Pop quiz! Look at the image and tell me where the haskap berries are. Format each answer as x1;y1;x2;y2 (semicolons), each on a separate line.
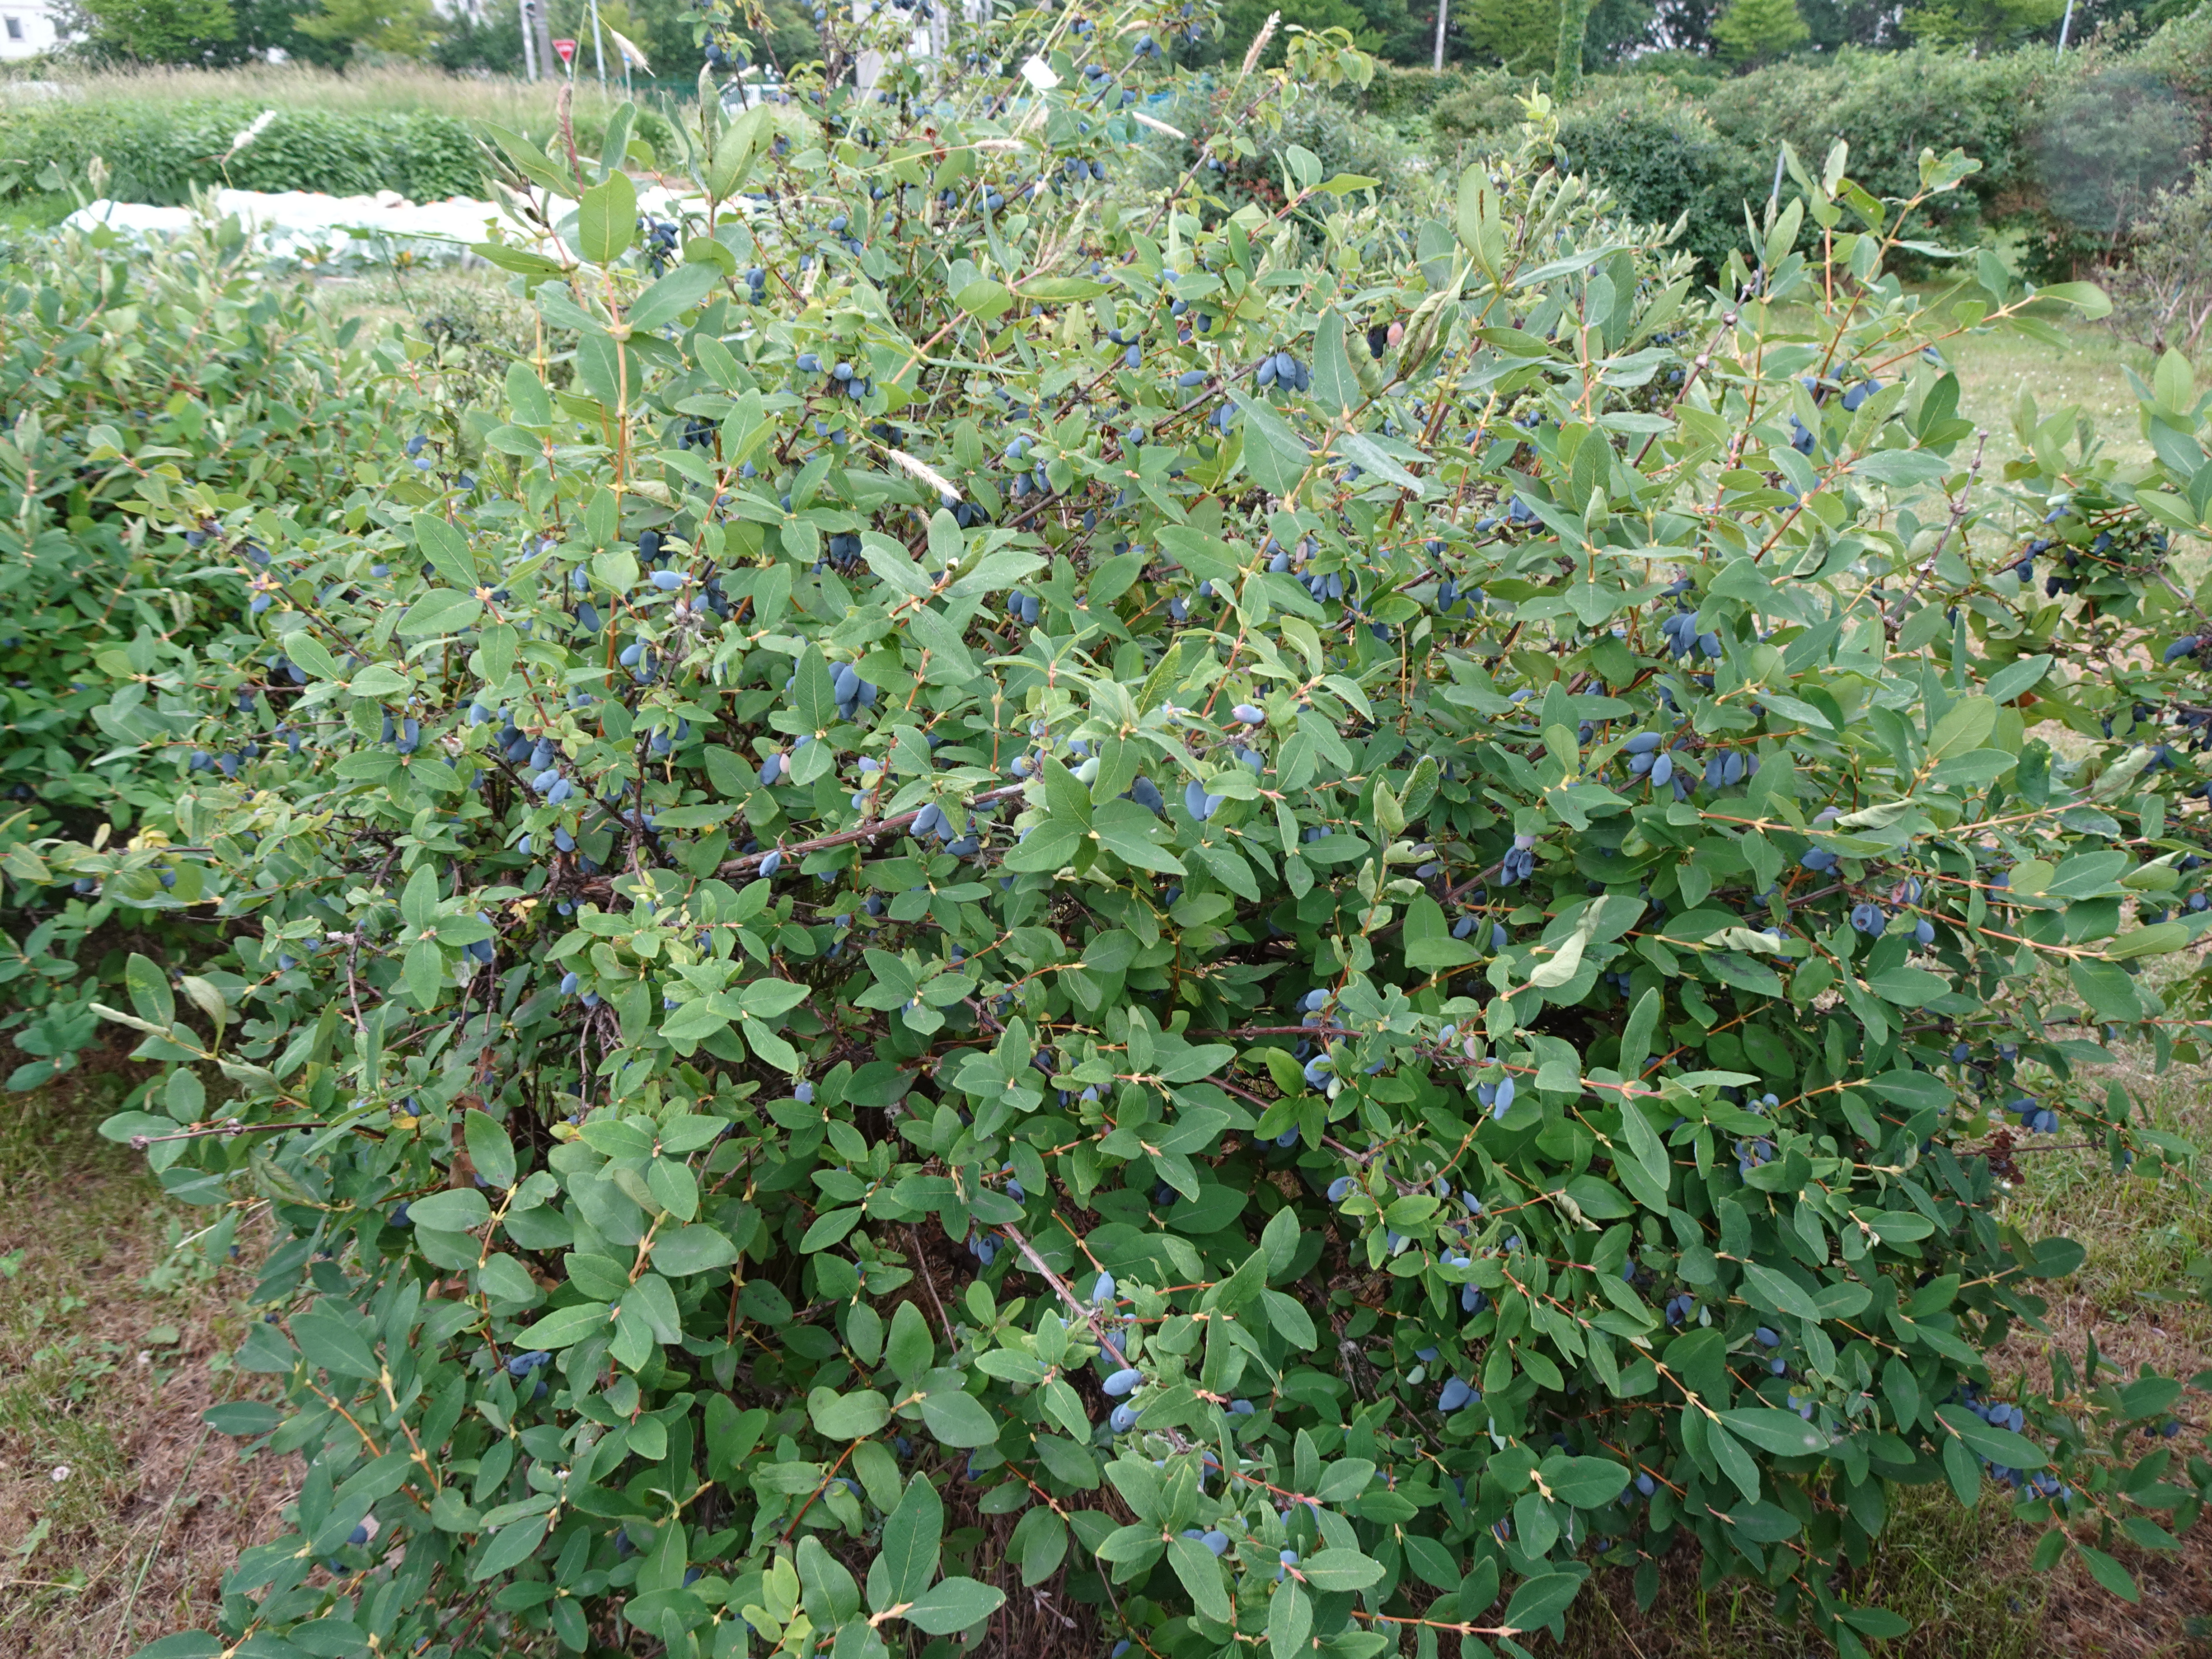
861;675;877;707
979;185;996;196
1670;633;1685;659
1039;40;1049;53
477;912;489;923
1556;233;1561;240
2132;706;2147;721
1507;493;1532;521
421;563;435;573
1657;335;1663;341
706;588;719;610
1078;23;1090;41
871;1;881;10
470;768;485;790
1724;751;1742;785
1673;775;1685;800
1999;1047;2016;1060
1007;175;1020;183
1653;898;1664;911
1347;571;1357;594
1233;667;1251;680
1268;922;1286;938
1437;1178;1451;1196
2112;705;2133;740
1468;587;1484;602
1114;100;1123;114
523;547;544;563
1422;415;1430;422
1070;1056;1080;1070
945;833;983;855
779;93;789;104
1152;1460;1162;1467
1102;1369;1145;1396
1786;908;1794;923
1116;433;1125;442
1385;419;1394;427
318;584;334;603
74;878;98;892
999;875;1013;890
2019;532;2035;542
1989;1399;2016;1420
1276;1549;1299;1579
1295;360;1309;392
414;458;431;468
1752;1141;1775;1161
865;1182;877;1189
1071;22;1080;33
1110;1406;1131;1432
579;601;598;632
532;1381;548;1397
991;1233;1004;1249
1050;177;1063;195
1077;596;1087;605
1824;805;1840;814
897;1438;912;1454
638;530;657;559
835;915;849;926
967;1454;981;1481
1373;621;1388;641
952;944;967;956
787;676;796;694
666;332;672;340
679;571;697;583
1451;1256;1473;1271
1202;1531;1230;1558
1920;1137;1933;1156
286;663;307;683
1514;419;1528;428
829;217;845;230
459;475;475;490
1000;476;1011;495
2008;1466;2024;1486
577;694;593;704
1688;645;1697;658
462;946;469;962
471;938;492;962
1321;825;1332;837
816;23;828;31
1865;903;1887;936
2064;549;2079;567
1619;987;1632;997
1673;738;1687;752
602;786;623;803
1813;475;1821;489
1339;475;1352;484
1036;1051;1052;1073
1554;419;1561;425
877;92;887;102
1153;442;1161;446
2047;1112;2058;1134
1303;1053;1332;1080
1255;1140;1267;1150
1093;1269;1115;1303
1170;470;1185;477
1625;731;1662;752
1948;606;1961;628
566;1115;578;1125
621;778;634;791
924;7;934;18
1389;321;1403;346
907;182;914;187
1131;544;1147;552
756;192;770;206
1989;1462;2009;1479
781;496;791;510
1672;718;1687;728
232;751;248;766
2106;1025;2116;1038
1923;1007;1937;1016
1378;546;1391;557
1461;1499;1466;1506
1472;920;1480;933
637;657;660;683
1180;328;1191;343
1058;1319;1071;1330
1759;630;1773;642
657;223;678;233
201;756;214;771
1762;1092;1781;1109
987;106;997;120
1785;482;1799;508
1813;811;1845;824
1363;556;1371;564
2033;1109;2047;1134
1669;371;1680;383
1410;843;1436;856
1678;1295;1695;1313
547;778;569;804
742;840;759;853
1368;325;1385;359
1463;1037;1479;1057
2063;579;2076;593
1037;174;1044;181
2149;744;2165;764
1733;1139;1752;1158
1849;902;1870;934
189;751;208;769
1081;1084;1099;1105
865;376;877;398
960;1108;974;1127
917;803;939;827
1326;1014;1345;1046
1652;396;1658;405
1311;575;1326;602
888;93;897;102
877;139;886;144
907;999;915;1009
759;753;779;784
714;664;723;686
1051;733;1066;748
2047;494;2069;506
1489;439;1498;446
1204;258;1219;272
1867;380;1883;394
1462;1283;1481;1312
1121;90;1135;104
1101;275;1113;283
222;754;237;776
1305;987;1334;1010
1619;973;1631;985
1801;376;1816;390
1296;993;1313;1010
543;540;559;555
1666;1299;1681;1322
809;92;821;101
1443;761;1455;780
970;1233;983;1256
1667;337;1673;342
1597;772;1609;780
1259;356;1276;385
2026;544;2037;560
869;930;877;936
1134;777;1162;813
866;892;883;916
620;644;646;666
867;130;873;142
621;810;636;823
835;666;858;702
897;82;905;92
1661;580;1691;595
1140;36;1153;48
1870;585;1882;600
289;730;300;753
892;0;901;8
1024;516;1035;528
1300;828;1309;841
1579;719;1595;744
2142;1427;2156;1437
1597;1540;1608;1552
1628;753;1655;772
1951;1039;1974;1064
1058;1089;1071;1107
1640;891;1651;901
1038;461;1055;490
800;254;809;270
1679;613;1700;647
1086;21;1097;32
936;809;952;838
759;852;781;878
1775;506;1785;513
1304;1501;1322;1527
890;428;902;445
1303;1011;1331;1042
2044;576;2061;598
330;1560;353;1577
348;1524;368;1545
872;186;885;199
1197;576;1220;600
831;116;842;125
1281;1510;1294;1523
1476;430;1488;438
482;581;510;598
1088;404;1093;418
1540;414;1548;420
656;837;663;845
1652;753;1672;786
533;767;562;792
858;128;868;134
911;885;927;891
617;1531;634;1552
1677;595;1688;608
970;799;1000;812
569;688;576;706
827;532;848;559
911;1;917;5
1967;611;1989;641
957;504;972;527
1938;1013;1953;1024
1219;162;1226;174
2143;705;2159;714
1645;1056;1664;1066
1789;413;1802;427
1963;1399;1979;1410
1719;748;1732;763
946;191;956;209
1083;508;1097;531
1033;749;1050;765
993;49;1003;56
651;570;684;589
978;1237;995;1264
553;824;575;853
2045;509;2068;523
1209;408;1225;426
1241;749;1264;776
1230;703;1267;723
1128;427;1144;442
1091;262;1099;275
1029;306;1042;316
1568;781;1579;788
1149;989;1162;998
872;140;878;148
1438;580;1453;611
1102;74;1112;84
1181;2;1194;18
398;716;423;753
2026;1470;2048;1488
970;501;984;520
1091;160;1105;180
816;421;828;437
677;436;688;449
726;51;740;61
1519;725;1533;730
979;53;990;63
1659;672;1679;703
405;696;422;712
1172;598;1185;620
1833;1422;1841;1430
1000;103;1005;113
1012;755;1035;775
1078;159;1088;181
1619;1489;1633;1507
1341;659;1347;668
1747;749;1759;775
1578;764;1585;775
709;575;724;592
1587;264;1596;275
360;920;366;926
1600;847;1613;857
1406;1365;1426;1385
1437;542;1449;555
1509;689;1537;703
794;1084;814;1105
442;863;452;876
1922;348;1940;364
1796;438;1817;457
1241;1517;1247;1526
1826;865;1842;875
1532;445;1538;454
1453;915;1472;938
780;753;790;774
580;855;599;875
1276;351;1295;378
1150;42;1161;60
683;1565;703;1581
908;512;917;521
1684;776;1697;794
2188;713;2206;733
509;730;536;762
1014;405;1031;419
2188;892;2206;909
1363;1060;1387;1075
948;955;967;968
797;354;817;370
1126;345;1141;369
1105;408;1119;418
493;495;501;501
847;534;862;558
1065;156;1078;171
668;529;684;541
276;723;289;741
1700;632;1720;658
1439;1378;1470;1411
645;898;656;916
523;536;546;548
557;902;574;915
1069;740;1093;756
484;1102;489;1110
1472;1296;1487;1315
1465;1389;1482;1409
1306;537;1319;558
403;1098;420;1115
1606;972;1618;982
816;360;823;370
916;107;925;117
970;53;978;64
1788;1394;1800;1411
1639;885;1648;893
704;1;713;6
696;931;715;954
1751;689;1770;719
924;104;932;116
304;939;319;952
1275;1125;1300;1146
2061;1486;2076;1508
1202;1451;1220;1476
1302;413;1309;421
1452;1477;1465;1494
2023;1484;2034;1500
671;715;691;740
76;684;87;690
1439;1023;1457;1042
1019;827;1034;843
1114;542;1127;555
1007;586;1026;615
1771;1357;1785;1374
981;419;992;427
921;1;929;7
1120;1312;1138;1324
721;516;727;527
1348;594;1371;620
1628;714;1638;726
1368;1138;1383;1155
237;694;253;711
1369;699;1375;705
1738;1159;1753;1185
811;560;827;577
651;726;671;755
231;1245;241;1258
1295;542;1307;564
2162;636;2197;664
1068;765;1081;774
815;7;828;19
771;92;779;101
522;617;537;629
684;420;699;445
1052;392;1057;397
2043;1480;2062;1494
1489;923;1508;950
1550;1432;1570;1446
1180;1527;1207;1539
465;703;492;726
1439;1245;1464;1266
2006;1098;2043;1112
2034;540;2051;550
1727;439;1734;448
1224;1411;1245;1429
1119;1399;1142;1425
1504;844;1527;868
830;363;853;380
979;64;989;77
803;1;812;6
845;53;855;65
942;484;959;509
1377;1613;1393;1627
457;697;474;707
1530;516;1544;535
1468;401;1476;408
1030;719;1047;737
1653;920;1662;928
1901;842;1909;851
819;870;838;882
993;998;1008;1015
806;456;817;463
2010;1406;2031;1431
722;1121;735;1133
387;1202;417;1227
1753;885;1782;906
397;607;409;620
375;717;397;742
901;1004;908;1014
782;136;791;144
510;1350;554;1376
1123;253;1134;260
1078;121;1088;133
1002;1161;1014;1172
249;592;273;612
268;654;293;668
1026;187;1035;203
1452;581;1463;601
1182;26;1194;44
1794;422;1810;444
858;757;880;772
357;1102;368;1117
660;231;677;247
537;737;556;752
1989;872;2010;900
635;635;650;645
1762;926;1781;937
1134;43;1147;55
2185;780;2211;799
1329;656;1337;662
776;143;785;153
519;835;534;854
1393;1236;1412;1257
1039;1361;1051;1374
569;1082;580;1098
1914;917;1936;944
1801;1402;1816;1420
1385;1228;1402;1250
279;954;294;969
746;269;759;283
642;814;665;831
1643;279;1649;286
975;194;1004;211
1231;1399;1256;1416
1777;932;1792;962
1109;329;1139;345
1294;1041;1312;1058
188;530;205;546
581;991;601;1007
162;866;177;887
1276;374;1294;391
1491;1077;1514;1118
738;55;748;68
1117;789;1133;801
853;1261;865;1279
2163;744;2176;769
1903;876;1922;902
2187;737;2199;751
475;1172;489;1188
1376;1471;1388;1482
1097;1082;1113;1095
1326;1174;1356;1203
698;424;711;448
714;599;728;617
990;274;997;281
2174;713;2192;725
706;33;714;42
1085;64;1104;75
668;858;677;864
652;233;666;256
1190;23;1200;38
1586;682;1605;697
1112;1641;1133;1659
1076;756;1105;786
371;564;389;576
1979;1090;1992;1102
707;44;721;57
1324;1076;1342;1099
1209;157;1219;169
450;818;464;835
2104;718;2116;741
575;563;591;589
2018;560;2033;583
458;627;470;632
408;436;427;453
1634;1473;1655;1495
1041;402;1049;411
663;996;681;1010
852;790;868;809
541;621;555;642
831;938;845;955
1700;1305;1712;1327
1468;892;1487;913
775;472;790;492
982;96;994;104
1204;794;1226;818
1255;684;1269;700
652;258;663;279
1078;247;1086;256
1517;847;1534;878
1445;350;1456;358
1493;1518;1511;1541
1185;780;1206;823
1829;363;1847;382
1669;702;1683;712
884;212;892;222
753;292;765;299
1425;540;1439;557
1938;1109;1945;1115
1475;518;1497;531
1975;1406;1992;1418
795;734;813;749
248;545;271;563
832;1479;865;1500
1031;37;1040;49
691;590;708;613
744;460;757;478
1164;887;1184;905
2163;1420;2182;1437
2094;532;2113;553
830;660;847;681
869;424;889;438
1381;1157;1390;1174
1297;705;1311;712
1530;410;1539;423
1414;397;1425;405
1363;724;1373;735
1259;537;1280;552
1669;1116;1687;1130
1270;551;1290;573
348;656;356;669
1155;269;1179;282
1709;504;1720;514
1295;570;1313;586
746;194;756;198
1339;1002;1354;1012
1005;434;1035;458
496;706;515;723
1198;313;1212;333
735;1612;742;1619
1005;1179;1026;1204
2140;907;2168;925
636;219;644;228
1416;861;1444;878
1415;1345;1441;1359
1976;1076;1988;1090
749;271;765;289
995;388;1011;400
1016;471;1033;497
1236;744;1248;759
902;0;912;10
1514;834;1537;849
1505;1235;1522;1252
1568;1381;1581;1395
899;37;903;43
445;758;457;768
939;187;949;201
782;273;790;279
1527;445;1531;449
1622;1259;1635;1282
1113;492;1123;516
1314;1070;1334;1090
1462;1190;1480;1213
841;697;860;718
1220;403;1235;436
1487;1058;1503;1065
1755;1329;1782;1345
1477;1075;1496;1108
1954;1388;1978;1397
1172;298;1189;314
1699;675;1716;688
242;741;260;756
1843;382;1867;409
1178;370;1210;386
852;242;863;254
2185;855;2200;867
1231;1474;1247;1493
2151;535;2167;555
832;429;846;445
1680;369;1686;375
1706;752;1723;789
1021;593;1042;625
562;973;577;995
836;1166;846;1172
1800;849;1837;870
1231;401;1240;410
1586;881;1606;891
1674;331;1682;336
504;725;519;747
1745;1098;1763;1114
1159;1185;1177;1204
1166;708;1191;723
1662;613;1690;634
862;134;869;146
2021;1109;2041;1128
1099;1328;1128;1358
717;496;734;506
1350;464;1360;479
1500;515;1510;522
1465;431;1476;441
1001;984;1013;1002
532;748;559;769
1466;982;1481;995
1501;866;1518;885
1327;571;1344;598
1614;629;1629;639
2124;1150;2134;1164
754;207;761;213
1916;1272;1935;1291
491;731;508;744
749;296;761;306
849;376;864;398
1016;985;1027;1006
965;818;978;833
1307;827;1319;842
1797;753;1811;765
1466;603;1476;618
484;1072;495;1086
571;897;587;907
910;821;938;835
